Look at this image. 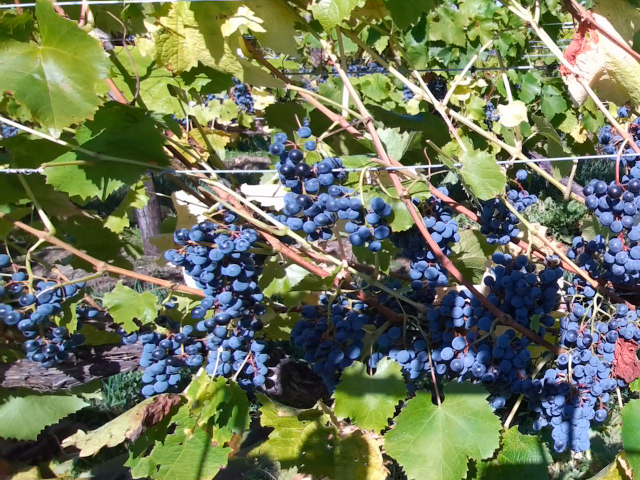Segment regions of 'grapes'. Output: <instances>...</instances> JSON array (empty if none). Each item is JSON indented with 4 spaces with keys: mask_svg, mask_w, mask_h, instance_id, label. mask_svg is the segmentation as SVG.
Instances as JSON below:
<instances>
[{
    "mask_svg": "<svg viewBox=\"0 0 640 480\" xmlns=\"http://www.w3.org/2000/svg\"><path fill=\"white\" fill-rule=\"evenodd\" d=\"M572 313L559 321L557 346L564 343H575L578 349L573 350L571 362L576 365L569 384L568 356L561 353L557 356L555 369H547L540 379L530 378L535 366L529 360L531 350L528 338L519 339L513 328H508L497 338L493 348L487 343H480L477 349L466 347V341L473 343L481 338L477 327L488 332L494 319L491 310L481 309L479 300L466 288L459 291L451 289L440 301L435 310L428 307L426 320L428 333L433 341L443 342L440 348H433L430 356L433 360V372L436 376L446 375L448 366L456 376L458 383L469 378L474 385H484L490 392L486 402L491 407L504 408L506 399L512 394H524L529 397L527 403L531 411L539 413L538 420L531 425L533 431H541L552 425L551 438L556 453H563L568 448L575 453L588 451L591 448L589 428L591 420L603 423L607 420L605 408L595 411V403L600 397L603 403L610 401L609 391H615L617 385L626 388L628 383L621 377H610V366L615 358L619 335L625 339L640 338V328L634 323L640 318V309L629 310L625 303L615 306L617 312L608 322H599L597 330L605 334L608 340H602L596 351L602 355L593 356L589 348L600 340L598 332L586 329L580 334L581 316L586 313L584 307L574 299Z\"/></svg>",
    "mask_w": 640,
    "mask_h": 480,
    "instance_id": "obj_1",
    "label": "grapes"
},
{
    "mask_svg": "<svg viewBox=\"0 0 640 480\" xmlns=\"http://www.w3.org/2000/svg\"><path fill=\"white\" fill-rule=\"evenodd\" d=\"M237 220L238 215L233 211H226L222 219L231 232L239 231V237L234 238L218 233L219 223L211 220L191 228H176L174 243L183 248L167 249L163 259L174 266L183 265L184 274L205 291L201 304L192 309V319H202L214 305L221 310L215 317L199 320L195 325L196 332L213 330L205 337V347L209 350L207 373L212 375L217 364L216 374L228 375L231 370L237 371L251 354L253 361L243 366L238 378L244 390H251L264 386L268 374L264 364L268 360L263 352L265 341L254 336L263 322L253 319L254 315L262 316L266 312L262 303L264 294L257 287L263 268L254 263L252 253H242L258 240V231L234 225ZM235 318L238 329L226 336L227 324Z\"/></svg>",
    "mask_w": 640,
    "mask_h": 480,
    "instance_id": "obj_2",
    "label": "grapes"
},
{
    "mask_svg": "<svg viewBox=\"0 0 640 480\" xmlns=\"http://www.w3.org/2000/svg\"><path fill=\"white\" fill-rule=\"evenodd\" d=\"M586 196L587 207L594 210L601 225L609 226L613 233H621L628 230L627 238L632 241L629 249L624 251V241L617 235L611 236L608 241L609 249L606 252L605 237L598 233L590 241L577 235L572 240L576 248L585 247L586 253L577 255L575 249H569L567 256L575 259V263L583 268L593 279L601 276L597 263L591 259L595 251L604 255L602 265L608 268L603 277L613 280L615 283H623L631 286L633 283L640 285V161L624 175L621 184L612 181L609 185L604 180L594 178L590 184L583 188Z\"/></svg>",
    "mask_w": 640,
    "mask_h": 480,
    "instance_id": "obj_3",
    "label": "grapes"
},
{
    "mask_svg": "<svg viewBox=\"0 0 640 480\" xmlns=\"http://www.w3.org/2000/svg\"><path fill=\"white\" fill-rule=\"evenodd\" d=\"M287 140L286 133L275 132L274 143L268 145V152L279 157L276 163L278 179L282 181L284 187H291L290 192L284 194L283 215L270 214L286 221L296 231H304L309 241L315 242L319 237L329 240L333 237V231L330 228H323L319 235L315 232L316 228L331 225L336 216L340 219H358L360 217L358 210L362 207L363 201L349 196L341 197L345 193L351 194L354 191L353 187L346 189L344 186L332 184L335 178L342 179L347 175V173L331 172L332 168H344L340 157L330 156L314 162L313 167L317 168L315 177L307 163H299L304 159L302 150L285 151ZM299 180L303 181L304 190L308 193L317 192L320 186L327 188V192L319 193L313 201L308 194L302 195V184ZM301 210L306 217L313 218V221L293 217Z\"/></svg>",
    "mask_w": 640,
    "mask_h": 480,
    "instance_id": "obj_4",
    "label": "grapes"
},
{
    "mask_svg": "<svg viewBox=\"0 0 640 480\" xmlns=\"http://www.w3.org/2000/svg\"><path fill=\"white\" fill-rule=\"evenodd\" d=\"M492 260L501 266L490 269L494 278H484L485 285L491 290L486 298L528 326L531 325V316L542 315L538 333L544 336L546 327L555 324V317L549 312L560 309L561 296L556 293L559 290L556 281L564 275L561 259L557 255H547L539 279L534 273L536 264L525 255L512 260L510 253L496 251L492 254Z\"/></svg>",
    "mask_w": 640,
    "mask_h": 480,
    "instance_id": "obj_5",
    "label": "grapes"
},
{
    "mask_svg": "<svg viewBox=\"0 0 640 480\" xmlns=\"http://www.w3.org/2000/svg\"><path fill=\"white\" fill-rule=\"evenodd\" d=\"M332 305V329L327 332V317L316 315L317 307L306 304L301 308V316L313 322L299 321L291 331L292 341L297 349H303L307 362L313 363V372L323 378L330 394L341 381L338 377L344 369L352 365L364 349L365 332L361 326L369 321L367 314L358 315L356 311H345L351 307L357 311L369 308L362 300L352 302L338 296Z\"/></svg>",
    "mask_w": 640,
    "mask_h": 480,
    "instance_id": "obj_6",
    "label": "grapes"
},
{
    "mask_svg": "<svg viewBox=\"0 0 640 480\" xmlns=\"http://www.w3.org/2000/svg\"><path fill=\"white\" fill-rule=\"evenodd\" d=\"M194 327L185 324L181 332L174 338H166L163 333H157L151 329L133 332L127 335L124 327L117 329V334L121 338L123 345H133L137 341L143 343L141 349L140 366L144 369L141 381L146 384L141 388L143 396H152L154 393H163L170 385H174L181 380V374L177 371L181 366L196 367L203 363L204 357L198 353L202 349V343H191L184 348L188 357H168L165 356L166 349H172L175 355H182V344L187 343L188 335L192 334Z\"/></svg>",
    "mask_w": 640,
    "mask_h": 480,
    "instance_id": "obj_7",
    "label": "grapes"
},
{
    "mask_svg": "<svg viewBox=\"0 0 640 480\" xmlns=\"http://www.w3.org/2000/svg\"><path fill=\"white\" fill-rule=\"evenodd\" d=\"M55 280H42L35 283V294L39 295L36 300L34 294L23 293L18 297V305L20 307L30 306L36 301L35 312L29 315V319L21 320V313L7 303H0V319L8 325H18V329L24 337H34L38 333L36 324L44 321V316L57 314L61 310V302L63 300L62 290L55 288L40 294L46 288L55 286Z\"/></svg>",
    "mask_w": 640,
    "mask_h": 480,
    "instance_id": "obj_8",
    "label": "grapes"
},
{
    "mask_svg": "<svg viewBox=\"0 0 640 480\" xmlns=\"http://www.w3.org/2000/svg\"><path fill=\"white\" fill-rule=\"evenodd\" d=\"M44 336L50 342L47 346L41 339L33 338H28L22 344V351L26 354V358L31 362H40L43 367L64 362L68 350L85 342V336L82 333H74L68 337L65 325L48 324L45 327Z\"/></svg>",
    "mask_w": 640,
    "mask_h": 480,
    "instance_id": "obj_9",
    "label": "grapes"
},
{
    "mask_svg": "<svg viewBox=\"0 0 640 480\" xmlns=\"http://www.w3.org/2000/svg\"><path fill=\"white\" fill-rule=\"evenodd\" d=\"M481 207L483 214L480 220V232L485 236L487 243L507 246L511 238L520 234V229L517 227L519 222L502 202L491 199L483 201Z\"/></svg>",
    "mask_w": 640,
    "mask_h": 480,
    "instance_id": "obj_10",
    "label": "grapes"
},
{
    "mask_svg": "<svg viewBox=\"0 0 640 480\" xmlns=\"http://www.w3.org/2000/svg\"><path fill=\"white\" fill-rule=\"evenodd\" d=\"M411 269L408 271V277L413 279L411 290L417 292L422 288V281L430 288L445 287L449 284V272L436 258L431 249L418 250L411 255Z\"/></svg>",
    "mask_w": 640,
    "mask_h": 480,
    "instance_id": "obj_11",
    "label": "grapes"
},
{
    "mask_svg": "<svg viewBox=\"0 0 640 480\" xmlns=\"http://www.w3.org/2000/svg\"><path fill=\"white\" fill-rule=\"evenodd\" d=\"M428 203L435 206L434 210L439 214V221H436L434 215L425 216L423 219L428 228H432L430 233L433 240L438 243L447 257L451 255V249L447 246L450 243L457 244L460 241V235L457 233L459 224L453 220V211L449 206H442V201L431 195Z\"/></svg>",
    "mask_w": 640,
    "mask_h": 480,
    "instance_id": "obj_12",
    "label": "grapes"
},
{
    "mask_svg": "<svg viewBox=\"0 0 640 480\" xmlns=\"http://www.w3.org/2000/svg\"><path fill=\"white\" fill-rule=\"evenodd\" d=\"M425 349L426 342L424 340H416L412 347L406 350L399 347L389 348L387 357L401 365L400 372L402 374H405L411 380H417L422 372L426 377L431 375L430 360Z\"/></svg>",
    "mask_w": 640,
    "mask_h": 480,
    "instance_id": "obj_13",
    "label": "grapes"
},
{
    "mask_svg": "<svg viewBox=\"0 0 640 480\" xmlns=\"http://www.w3.org/2000/svg\"><path fill=\"white\" fill-rule=\"evenodd\" d=\"M371 212L365 214V220L372 226H376L373 235L378 240L387 239L391 235V228L386 224L378 225L382 217H388L392 213V206L380 196H374L370 200Z\"/></svg>",
    "mask_w": 640,
    "mask_h": 480,
    "instance_id": "obj_14",
    "label": "grapes"
},
{
    "mask_svg": "<svg viewBox=\"0 0 640 480\" xmlns=\"http://www.w3.org/2000/svg\"><path fill=\"white\" fill-rule=\"evenodd\" d=\"M505 193L507 198L515 205L519 213H523L527 207H531L537 202V196L535 194H529L527 189H523L520 192L514 188L507 187Z\"/></svg>",
    "mask_w": 640,
    "mask_h": 480,
    "instance_id": "obj_15",
    "label": "grapes"
},
{
    "mask_svg": "<svg viewBox=\"0 0 640 480\" xmlns=\"http://www.w3.org/2000/svg\"><path fill=\"white\" fill-rule=\"evenodd\" d=\"M345 231L350 235L349 243L354 246H362L372 237V232L367 226L359 227L355 221H349L344 224Z\"/></svg>",
    "mask_w": 640,
    "mask_h": 480,
    "instance_id": "obj_16",
    "label": "grapes"
},
{
    "mask_svg": "<svg viewBox=\"0 0 640 480\" xmlns=\"http://www.w3.org/2000/svg\"><path fill=\"white\" fill-rule=\"evenodd\" d=\"M572 283L581 287L576 289L574 286H569L566 291L568 296H575L578 293L591 298L595 295V289L591 287L581 276L575 275L572 279Z\"/></svg>",
    "mask_w": 640,
    "mask_h": 480,
    "instance_id": "obj_17",
    "label": "grapes"
},
{
    "mask_svg": "<svg viewBox=\"0 0 640 480\" xmlns=\"http://www.w3.org/2000/svg\"><path fill=\"white\" fill-rule=\"evenodd\" d=\"M401 335V328L399 326H393L387 330V333H382L378 336L377 346L379 348H386L389 343L397 341Z\"/></svg>",
    "mask_w": 640,
    "mask_h": 480,
    "instance_id": "obj_18",
    "label": "grapes"
},
{
    "mask_svg": "<svg viewBox=\"0 0 640 480\" xmlns=\"http://www.w3.org/2000/svg\"><path fill=\"white\" fill-rule=\"evenodd\" d=\"M85 286H86V282L63 287L64 295L67 298H72L73 296L76 295L77 289L83 288Z\"/></svg>",
    "mask_w": 640,
    "mask_h": 480,
    "instance_id": "obj_19",
    "label": "grapes"
}]
</instances>
